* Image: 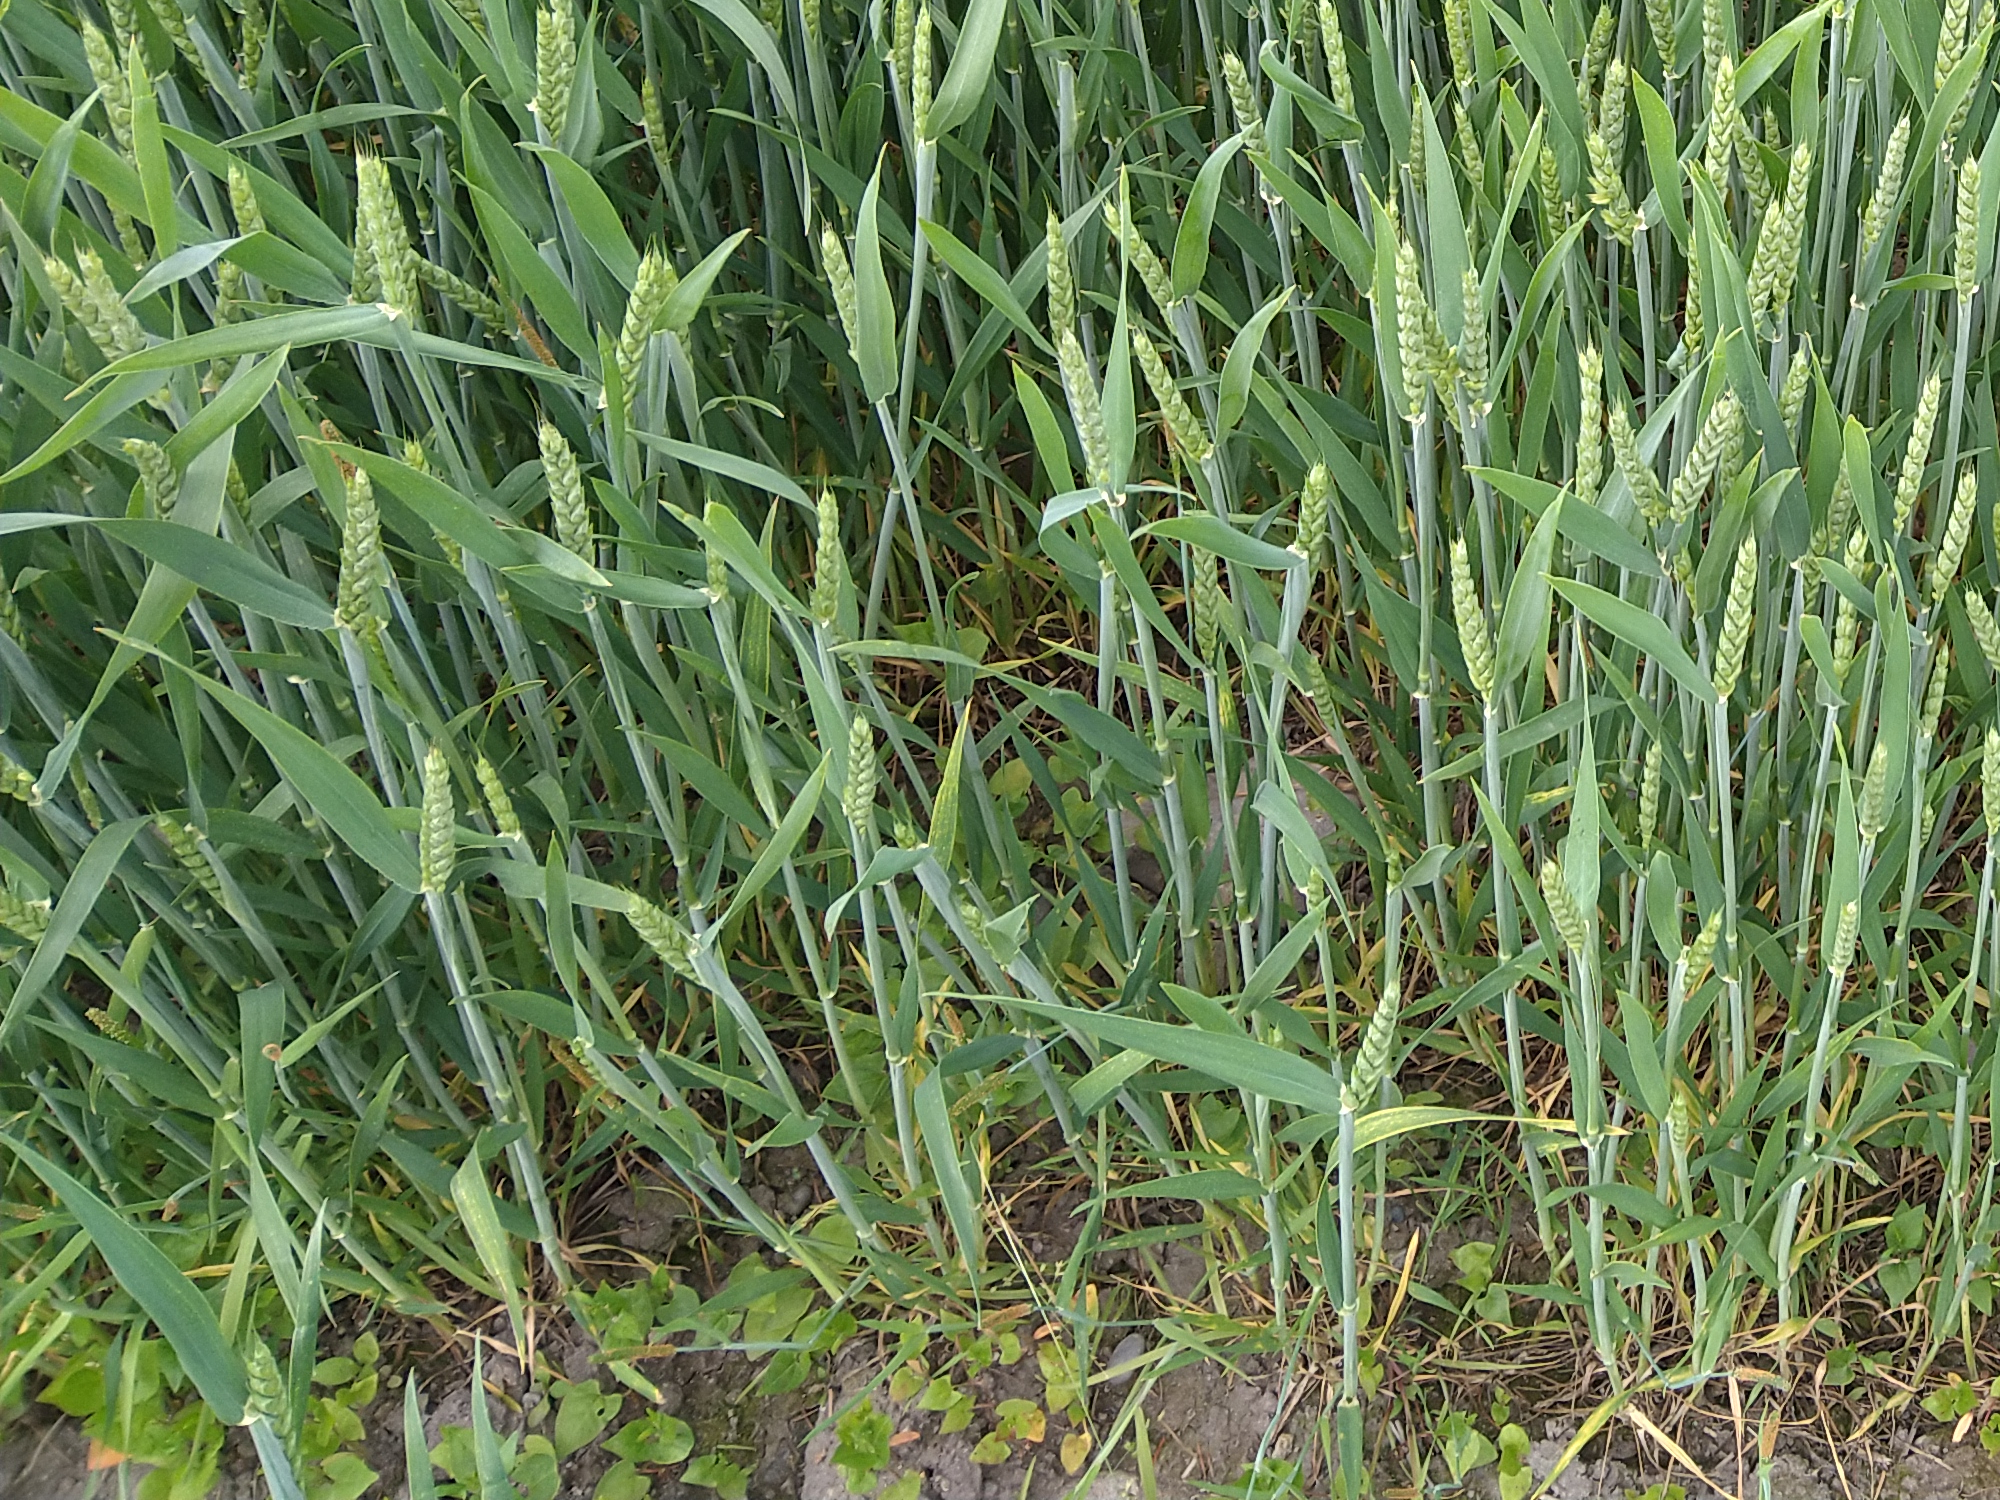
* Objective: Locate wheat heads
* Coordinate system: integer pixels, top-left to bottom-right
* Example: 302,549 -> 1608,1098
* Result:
1776,142 -> 1809,300
1953,151 -> 1980,294
404,442 -> 462,567
1604,401 -> 1671,532
399,0 -> 494,40
1463,268 -> 1496,407
1893,369 -> 1942,541
1387,201 -> 1396,242
1223,53 -> 1263,150
530,7 -> 560,134
1831,525 -> 1865,669
223,166 -> 281,312
1131,332 -> 1212,460
1833,901 -> 1860,967
352,202 -> 383,306
243,16 -> 264,80
1429,319 -> 1461,429
1671,1091 -> 1689,1150
566,1036 -> 616,1093
1301,0 -> 1312,59
226,455 -> 255,530
760,0 -> 782,30
1047,213 -> 1082,347
1917,804 -> 1934,847
1283,0 -> 1324,43
1706,56 -> 1734,202
244,1339 -> 304,1491
1719,412 -> 1746,505
1702,0 -> 1723,93
204,262 -> 244,400
839,719 -> 874,837
1103,206 -> 1178,307
826,631 -> 857,669
58,336 -> 95,386
419,750 -> 455,882
1578,1 -> 1612,129
962,902 -> 994,954
71,252 -> 148,352
59,447 -> 106,475
134,0 -> 207,77
1298,465 -> 1328,579
1506,150 -> 1521,201
1586,134 -> 1641,234
407,249 -> 508,331
475,754 -> 521,835
660,251 -> 693,366
1460,0 -> 1477,71
1395,237 -> 1427,421
1981,729 -> 2000,834
642,76 -> 668,164
357,156 -> 411,312
96,0 -> 150,79
0,763 -> 34,802
597,258 -> 665,412
1457,103 -> 1480,187
1309,658 -> 1334,730
891,0 -> 912,98
537,425 -> 593,567
1933,0 -> 1977,104
1639,742 -> 1660,856
1346,981 -> 1399,1109
1766,106 -> 1779,148
821,229 -> 860,351
0,568 -> 25,645
77,16 -> 133,154
1594,59 -> 1630,166
705,543 -> 722,583
1994,499 -> 2000,560
1965,591 -> 2000,679
110,201 -> 149,266
1931,474 -> 1976,604
0,883 -> 54,945
334,467 -> 373,635
1543,148 -> 1566,245
1825,449 -> 1858,564
1321,0 -> 1359,109
811,490 -> 835,630
377,159 -> 421,311
359,627 -> 392,684
1801,523 -> 1829,614
1674,390 -> 1747,525
907,2 -> 933,139
1411,96 -> 1432,189
122,436 -> 178,524
45,258 -> 155,407
1683,228 -> 1706,352
85,1008 -> 134,1042
1574,349 -> 1602,505
1780,354 -> 1808,455
1309,865 -> 1322,931
1735,115 -> 1773,216
1712,538 -> 1755,694
1922,643 -> 1950,732
1866,116 -> 1911,259
1681,914 -> 1721,993
1194,543 -> 1220,670
549,0 -> 576,100
1951,4 -> 1994,141
1636,0 -> 1675,70
1446,0 -> 1466,96
155,816 -> 228,908
1540,857 -> 1603,945
1747,202 -> 1783,330
1862,748 -> 1885,829
619,886 -> 702,978
1058,341 -> 1113,483
1447,537 -> 1495,710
